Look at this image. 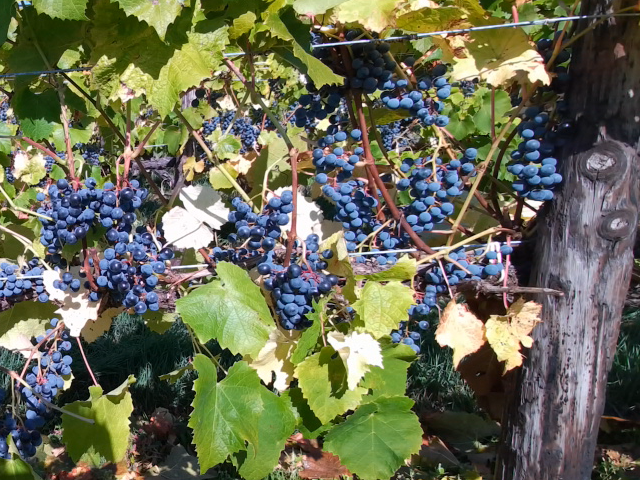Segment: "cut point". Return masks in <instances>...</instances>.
I'll use <instances>...</instances> for the list:
<instances>
[{
  "label": "cut point",
  "mask_w": 640,
  "mask_h": 480,
  "mask_svg": "<svg viewBox=\"0 0 640 480\" xmlns=\"http://www.w3.org/2000/svg\"><path fill=\"white\" fill-rule=\"evenodd\" d=\"M491 239H492V233L489 234V236H488V241H487L488 247L485 249V251L482 254H480V257H484V256L487 255V253H488V251L490 249Z\"/></svg>",
  "instance_id": "obj_3"
},
{
  "label": "cut point",
  "mask_w": 640,
  "mask_h": 480,
  "mask_svg": "<svg viewBox=\"0 0 640 480\" xmlns=\"http://www.w3.org/2000/svg\"><path fill=\"white\" fill-rule=\"evenodd\" d=\"M289 156H290V152H288L286 155L282 156L281 158L277 159L276 162H274L270 167H268L264 172V180L268 179V173H269L270 170H272L281 161H283L284 159L288 158Z\"/></svg>",
  "instance_id": "obj_1"
},
{
  "label": "cut point",
  "mask_w": 640,
  "mask_h": 480,
  "mask_svg": "<svg viewBox=\"0 0 640 480\" xmlns=\"http://www.w3.org/2000/svg\"><path fill=\"white\" fill-rule=\"evenodd\" d=\"M27 251H28V249L25 248L24 252H23V255H22L21 262H20V268H23V264H24V261H25V258H26Z\"/></svg>",
  "instance_id": "obj_4"
},
{
  "label": "cut point",
  "mask_w": 640,
  "mask_h": 480,
  "mask_svg": "<svg viewBox=\"0 0 640 480\" xmlns=\"http://www.w3.org/2000/svg\"><path fill=\"white\" fill-rule=\"evenodd\" d=\"M122 159H123V154H121V155L119 156V158H118V160H117V162H116V165H115L116 181H119V172H118V168H119V164H120V162L122 161Z\"/></svg>",
  "instance_id": "obj_2"
}]
</instances>
